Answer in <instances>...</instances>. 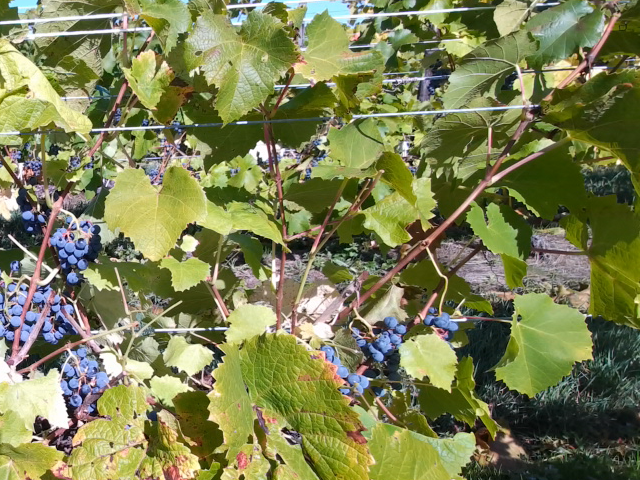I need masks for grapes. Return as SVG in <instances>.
<instances>
[{
  "label": "grapes",
  "instance_id": "e5b3c951",
  "mask_svg": "<svg viewBox=\"0 0 640 480\" xmlns=\"http://www.w3.org/2000/svg\"><path fill=\"white\" fill-rule=\"evenodd\" d=\"M19 289L22 291L19 295H18V300L16 298L15 295H12L10 298L11 302H16L18 304H14L12 307L7 309V314L11 315L12 317L10 318V328L14 329V328H18L20 321H21V315H22V311H23V307L21 305H24L26 300H27V289L28 286L27 285H20Z\"/></svg>",
  "mask_w": 640,
  "mask_h": 480
},
{
  "label": "grapes",
  "instance_id": "5460f4e3",
  "mask_svg": "<svg viewBox=\"0 0 640 480\" xmlns=\"http://www.w3.org/2000/svg\"><path fill=\"white\" fill-rule=\"evenodd\" d=\"M66 377H72L69 381L61 380L60 388L63 390L64 397H70L68 404L71 407H79L82 404V397L79 394H74V389L79 386V373L76 367L71 364H66L64 367Z\"/></svg>",
  "mask_w": 640,
  "mask_h": 480
},
{
  "label": "grapes",
  "instance_id": "f8a65327",
  "mask_svg": "<svg viewBox=\"0 0 640 480\" xmlns=\"http://www.w3.org/2000/svg\"><path fill=\"white\" fill-rule=\"evenodd\" d=\"M320 351L326 352V359L337 365L339 368L337 369V375L341 378H346L350 385L356 384V389L359 393L364 394L366 389L370 387V379L365 375H360L357 373H350L349 369L341 364V359L336 357L335 350L333 347L329 345H322Z\"/></svg>",
  "mask_w": 640,
  "mask_h": 480
},
{
  "label": "grapes",
  "instance_id": "ef6de9ee",
  "mask_svg": "<svg viewBox=\"0 0 640 480\" xmlns=\"http://www.w3.org/2000/svg\"><path fill=\"white\" fill-rule=\"evenodd\" d=\"M41 317V313L40 312H33V311H29L27 313V317H26V324L24 327V330L20 333V340L22 342H26L28 339L29 334L32 332V330L35 328V324L38 322V320Z\"/></svg>",
  "mask_w": 640,
  "mask_h": 480
},
{
  "label": "grapes",
  "instance_id": "1ff8f66d",
  "mask_svg": "<svg viewBox=\"0 0 640 480\" xmlns=\"http://www.w3.org/2000/svg\"><path fill=\"white\" fill-rule=\"evenodd\" d=\"M0 321L4 325H0V337H5L8 342H14V331L8 330L5 325L8 324V319L3 311H0Z\"/></svg>",
  "mask_w": 640,
  "mask_h": 480
},
{
  "label": "grapes",
  "instance_id": "83cd7487",
  "mask_svg": "<svg viewBox=\"0 0 640 480\" xmlns=\"http://www.w3.org/2000/svg\"><path fill=\"white\" fill-rule=\"evenodd\" d=\"M428 314L424 318V324L426 326H435L437 328L446 329L448 332L444 335V339L449 341L453 338L454 332H457L460 329V325L451 320V315L448 312H444L440 315V317H434L432 314H436L438 309L436 307L430 306L428 308Z\"/></svg>",
  "mask_w": 640,
  "mask_h": 480
},
{
  "label": "grapes",
  "instance_id": "2adb6a1f",
  "mask_svg": "<svg viewBox=\"0 0 640 480\" xmlns=\"http://www.w3.org/2000/svg\"><path fill=\"white\" fill-rule=\"evenodd\" d=\"M52 294V287L50 284H46L44 286L37 285L36 292L33 294L32 303H39L38 307L40 309L44 308V304L49 299Z\"/></svg>",
  "mask_w": 640,
  "mask_h": 480
},
{
  "label": "grapes",
  "instance_id": "84f90ec7",
  "mask_svg": "<svg viewBox=\"0 0 640 480\" xmlns=\"http://www.w3.org/2000/svg\"><path fill=\"white\" fill-rule=\"evenodd\" d=\"M72 353L80 360V371L90 379L96 378V385L92 390V394L96 395L100 390L105 389L109 382V376L104 370H100V365L96 360L86 358L88 349L85 346H79L77 349H73Z\"/></svg>",
  "mask_w": 640,
  "mask_h": 480
},
{
  "label": "grapes",
  "instance_id": "01657485",
  "mask_svg": "<svg viewBox=\"0 0 640 480\" xmlns=\"http://www.w3.org/2000/svg\"><path fill=\"white\" fill-rule=\"evenodd\" d=\"M383 326L385 328H375L373 330V333L378 337H375L373 342L370 343L360 337L361 332L358 328L353 327L351 329L352 336L356 338V345L366 348L376 363H382L385 360V355H389L399 348L403 342L402 335L408 333V327L405 324H400L394 316H386L383 319Z\"/></svg>",
  "mask_w": 640,
  "mask_h": 480
},
{
  "label": "grapes",
  "instance_id": "0513c4c2",
  "mask_svg": "<svg viewBox=\"0 0 640 480\" xmlns=\"http://www.w3.org/2000/svg\"><path fill=\"white\" fill-rule=\"evenodd\" d=\"M50 311L47 313V316L44 320V323L40 329V335H43L45 339V343L58 345L59 340L63 339L64 335H78L79 331L69 322L68 319L65 318L62 313V309L67 311L69 314L74 313V306L71 303H63L61 305V298L59 295L54 296V300L51 301V305L49 306ZM56 317V321H60L61 324L56 326V331L51 332L52 323L50 322L49 317Z\"/></svg>",
  "mask_w": 640,
  "mask_h": 480
},
{
  "label": "grapes",
  "instance_id": "b958b902",
  "mask_svg": "<svg viewBox=\"0 0 640 480\" xmlns=\"http://www.w3.org/2000/svg\"><path fill=\"white\" fill-rule=\"evenodd\" d=\"M67 232L66 228H58L57 232L53 233L50 237V245L57 247L59 266L62 270H66L70 265L80 271L88 269V260L81 259L83 256H87L90 253V246L88 245L86 238L81 237L79 240H75L74 244L70 243L75 238L73 233L69 236H64Z\"/></svg>",
  "mask_w": 640,
  "mask_h": 480
},
{
  "label": "grapes",
  "instance_id": "54f908b8",
  "mask_svg": "<svg viewBox=\"0 0 640 480\" xmlns=\"http://www.w3.org/2000/svg\"><path fill=\"white\" fill-rule=\"evenodd\" d=\"M79 227H80V229H81L83 232H85V233H88V232H89V230H90L91 232H94V231H95V226H94V225H91L89 222H86V221H80V222H79Z\"/></svg>",
  "mask_w": 640,
  "mask_h": 480
}]
</instances>
